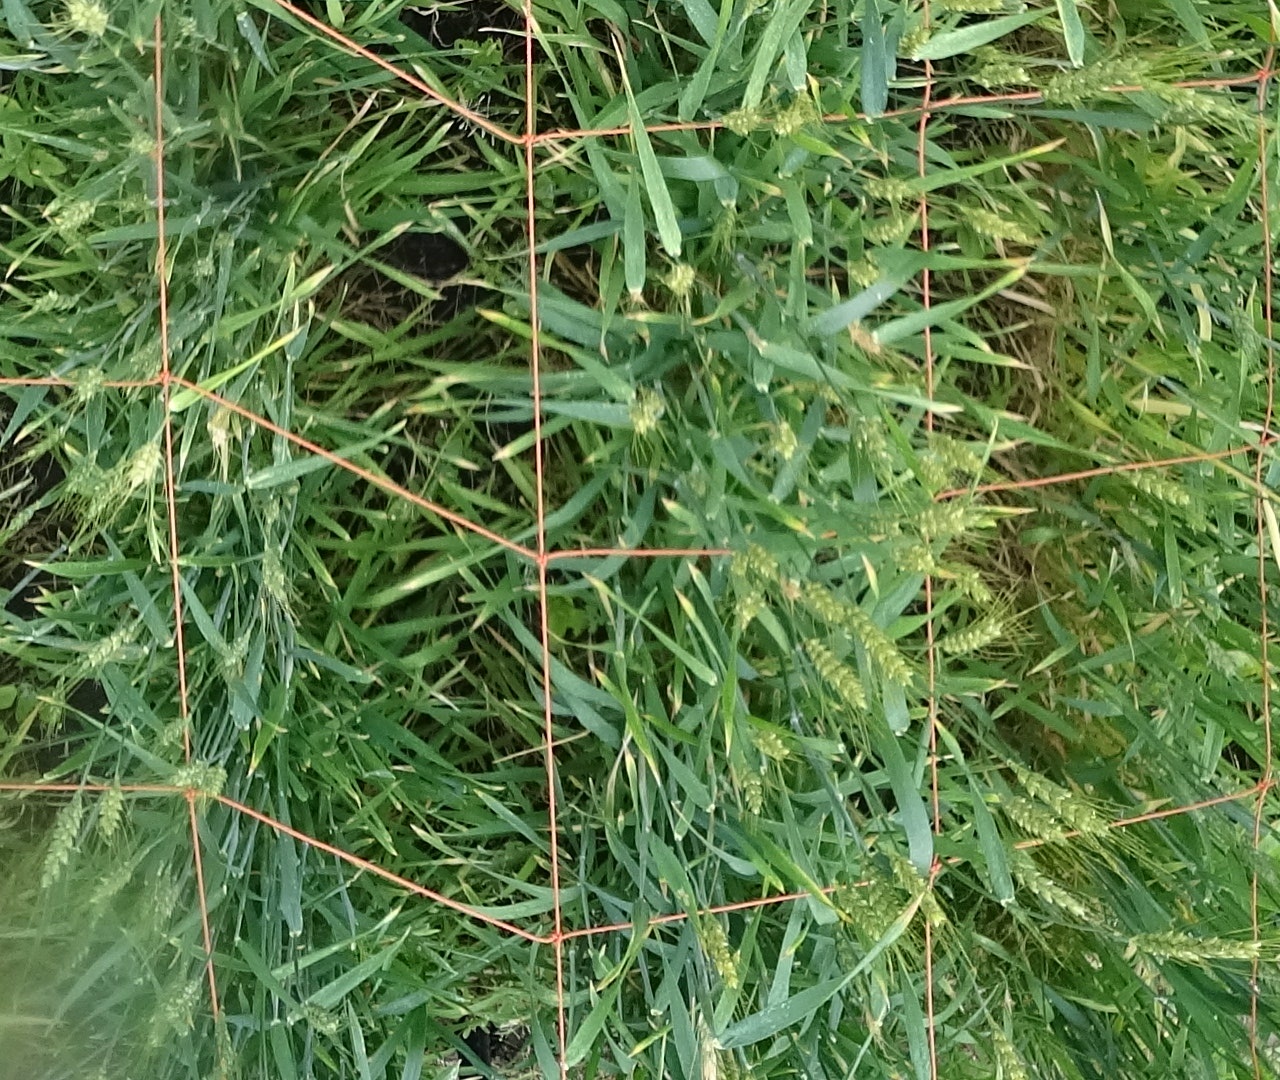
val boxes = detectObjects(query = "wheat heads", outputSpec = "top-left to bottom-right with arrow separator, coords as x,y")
1039,53 -> 1139,101
860,420 -> 900,474
845,259 -> 877,286
1112,476 -> 1187,506
773,419 -> 804,470
56,922 -> 102,975
32,802 -> 87,904
49,198 -> 98,228
858,857 -> 893,924
968,202 -> 1030,240
666,258 -> 701,295
1202,634 -> 1242,673
940,0 -> 1014,8
837,884 -> 882,946
970,58 -> 1030,88
942,617 -> 1007,656
1139,934 -> 1262,959
991,799 -> 1065,848
129,132 -> 157,155
901,29 -> 924,60
796,573 -> 843,623
171,983 -> 205,1019
147,965 -> 184,1031
92,621 -> 127,668
907,497 -> 969,529
78,465 -> 121,517
742,587 -> 766,625
101,790 -> 127,835
848,604 -> 916,688
892,855 -> 938,920
1013,872 -> 1086,921
745,533 -> 782,582
261,544 -> 286,595
991,1035 -> 1022,1072
856,169 -> 902,202
91,870 -> 140,902
701,916 -> 740,980
1141,74 -> 1249,135
801,636 -> 862,708
769,103 -> 810,132
30,286 -> 78,314
73,0 -> 119,37
226,628 -> 256,662
930,434 -> 979,472
634,389 -> 659,434
947,566 -> 990,604
746,726 -> 785,761
140,341 -> 179,381
818,378 -> 848,408
200,763 -> 231,801
76,373 -> 104,396
719,111 -> 751,133
1007,761 -> 1116,837
154,871 -> 178,928
127,443 -> 169,487
69,103 -> 98,123
736,757 -> 766,814
161,715 -> 194,753
890,541 -> 943,575
855,218 -> 906,244
300,1003 -> 345,1031
166,761 -> 210,790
